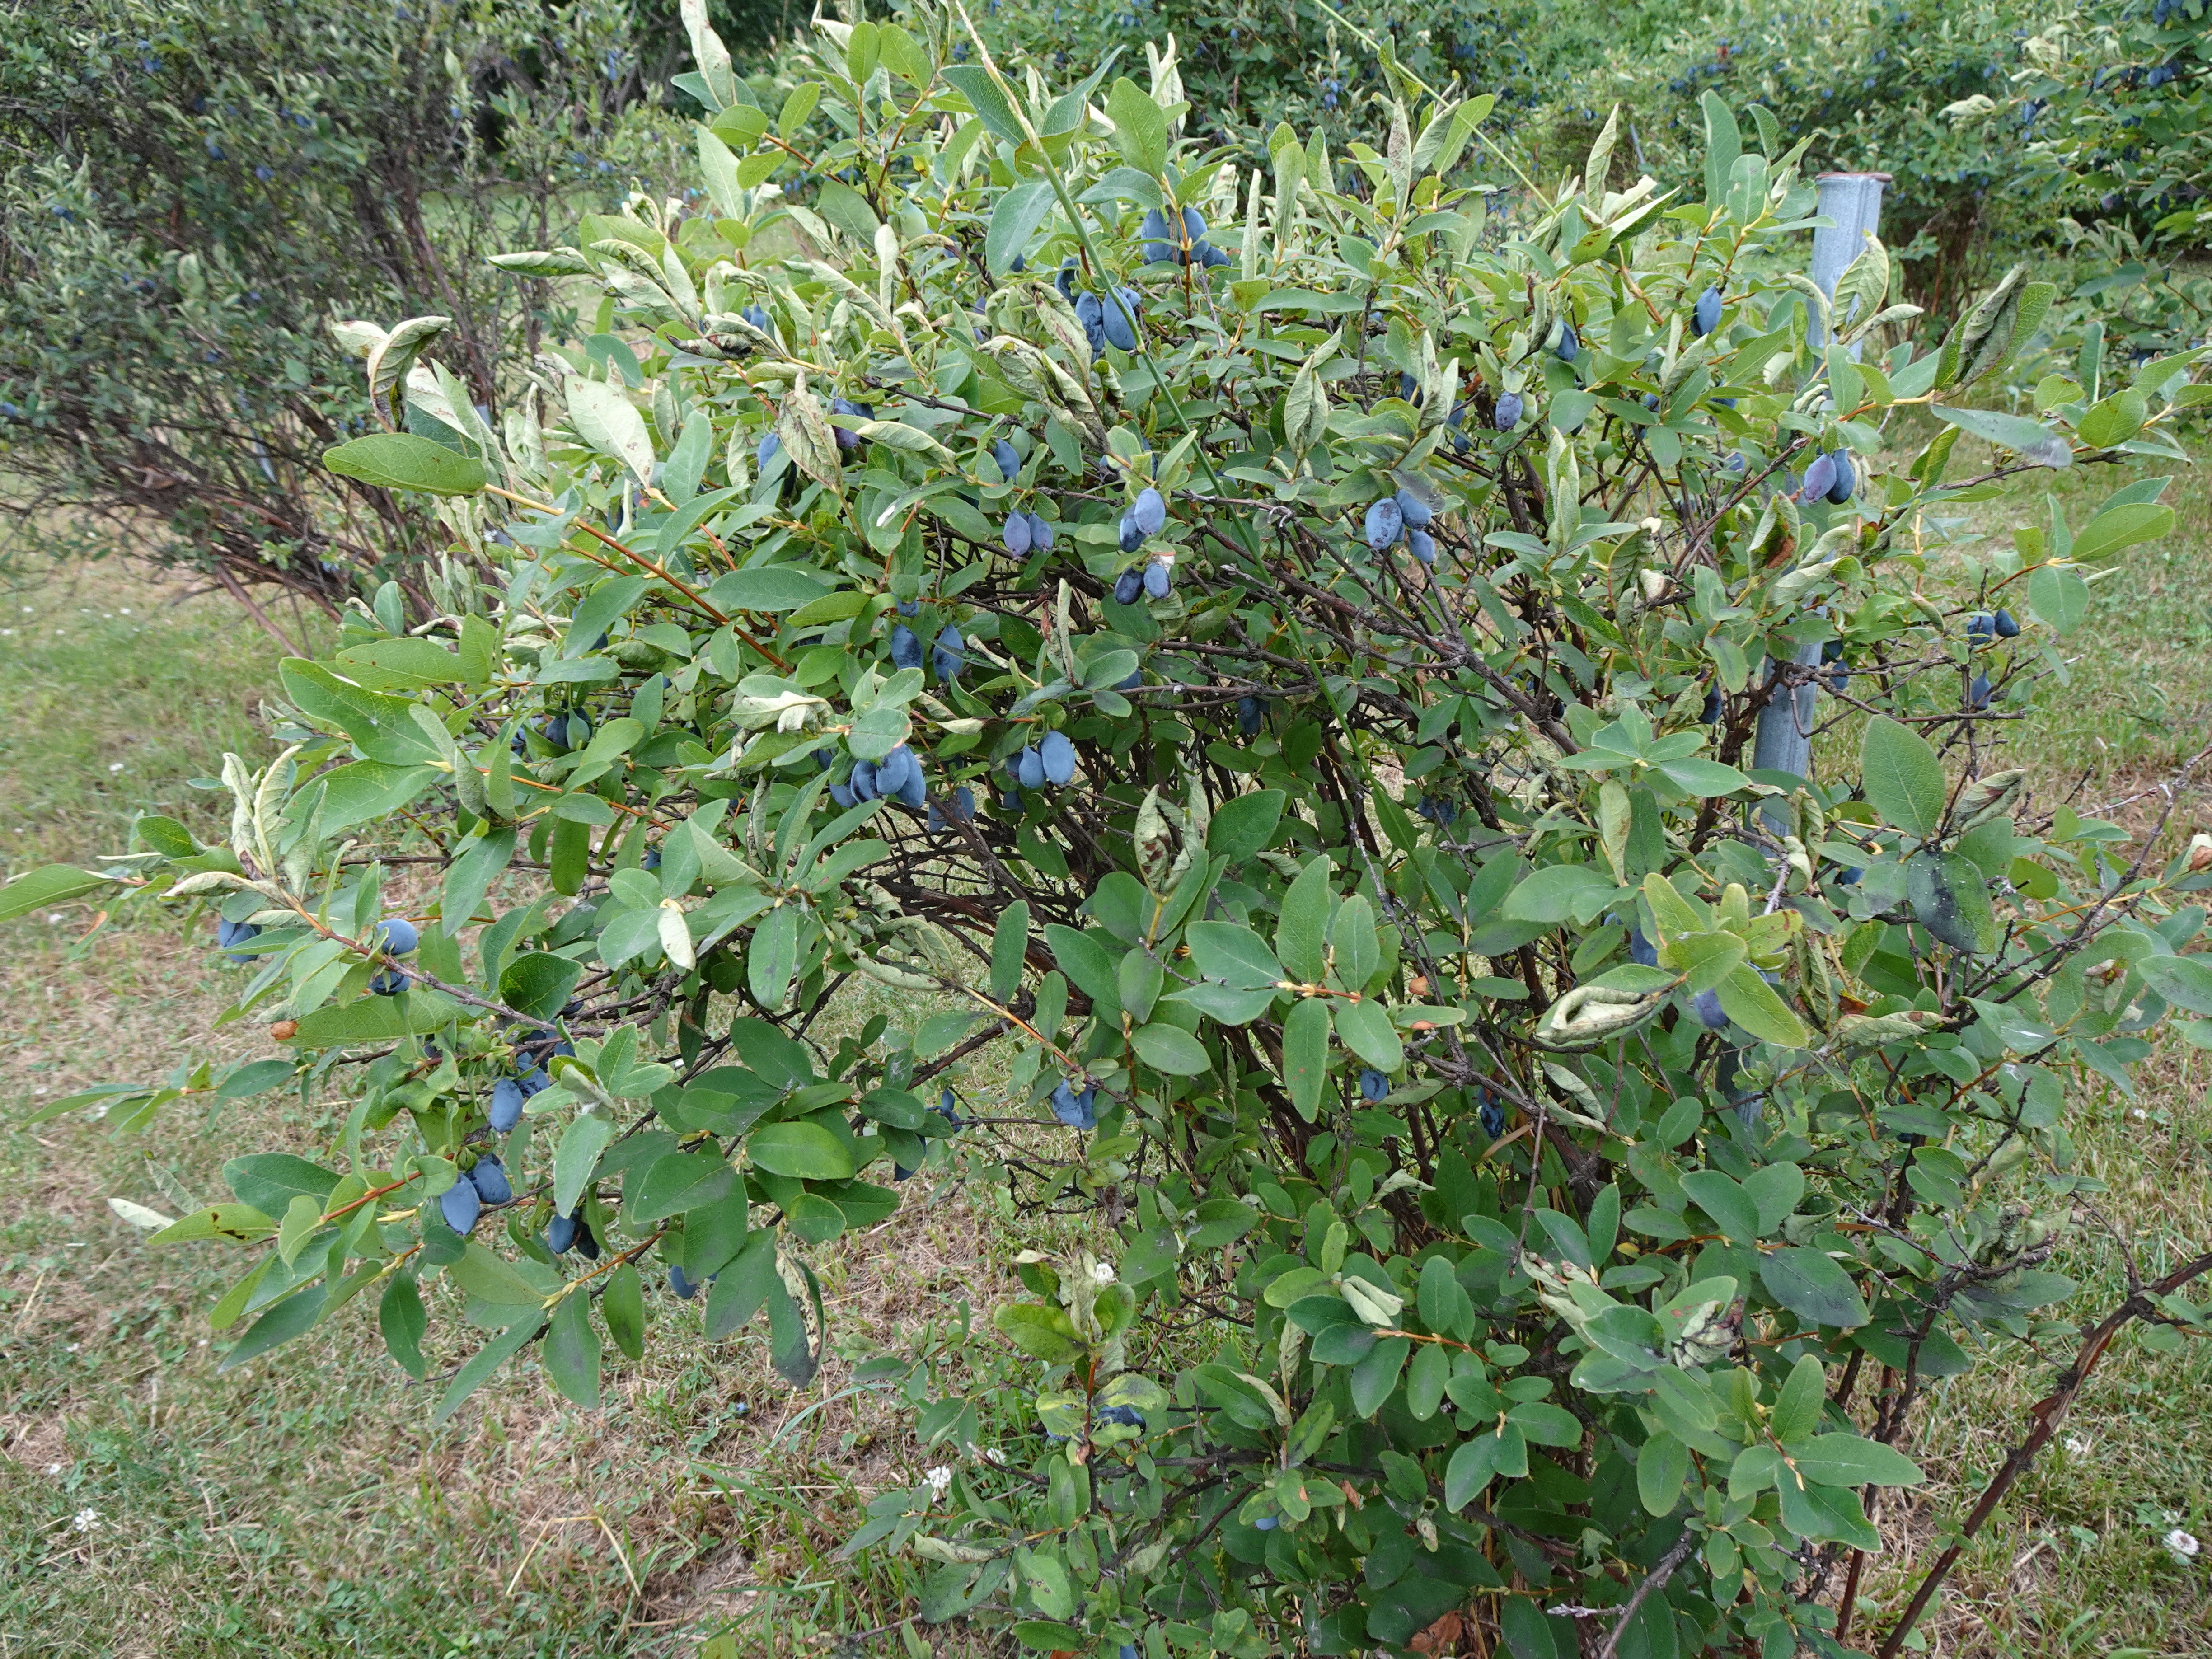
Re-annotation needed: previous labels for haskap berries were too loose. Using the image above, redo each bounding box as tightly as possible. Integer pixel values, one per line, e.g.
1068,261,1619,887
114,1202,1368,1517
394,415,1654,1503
925,1107,963,1132
1255,697,1271,714
1213,469,1239,488
931,803,948,831
843,400,853,409
496,531,512,548
1099,1404,1147,1435
1141,206,1171,263
559,995,584,1016
1409,530,1434,563
548,1209,576,1254
1049,1081,1084,1127
1802,452,1836,506
992,438,1020,483
1093,329,1104,352
729,791,745,809
1076,1089,1096,1129
974,327,984,342
1995,607,2019,637
492,1077,525,1137
1254,1512,1282,1530
1400,371,1427,409
1180,207,1210,262
1478,1086,1488,1104
1631,923,1659,967
1365,498,1403,551
1145,250,1191,266
1553,320,1578,362
1104,288,1136,351
1449,399,1466,427
1042,730,1074,788
1055,258,1081,300
1827,449,1855,506
563,699,593,738
1527,677,1535,691
546,712,567,747
1970,668,1992,709
1727,451,1746,474
1203,244,1230,271
511,727,526,746
1699,679,1729,727
661,675,672,687
1709,396,1736,413
1831,660,1849,690
825,767,858,812
1495,390,1523,431
941,1089,955,1111
928,229,933,234
1112,668,1141,692
669,1265,697,1299
901,199,927,243
1075,290,1102,344
1396,488,1431,529
1047,1401,1072,1440
1006,752,1021,779
1357,1067,1391,1106
1644,392,1660,414
889,592,919,618
707,1271,717,1282
566,704,590,750
1014,739,1049,791
1634,425,1646,440
517,1030,554,1071
368,966,410,996
576,1221,599,1260
1967,609,1996,645
1144,562,1170,600
424,1045,442,1059
882,742,927,811
751,304,766,332
1114,566,1144,606
1120,1642,1139,1659
1090,352,1096,363
1840,865,1864,886
218,917,258,965
1010,426,1030,463
1003,789,1025,813
1480,1097,1505,1137
1820,639,1845,663
1690,285,1721,338
515,1052,533,1066
1238,695,1258,718
1369,311,1381,323
475,1161,512,1205
896,748,931,813
1119,501,1143,551
1455,432,1469,456
545,1018,577,1057
1139,438,1158,480
632,491,647,505
819,744,838,774
890,623,924,672
698,319,704,333
832,398,861,448
644,847,661,871
1695,987,1731,1028
1417,794,1437,818
1136,487,1165,532
757,432,779,467
1604,912,1621,928
1024,509,1055,556
974,296,987,315
944,234,958,258
810,750,817,760
373,918,419,956
853,401,875,445
572,598,608,650
480,1152,503,1175
1010,252,1023,272
893,1132,926,1180
931,621,969,685
1394,525,1404,541
607,505,623,533
740,307,751,323
1121,287,1139,309
440,1171,482,1240
517,1061,550,1099
949,786,974,824
1241,710,1261,735
1437,794,1458,830
1098,454,1108,468
1001,508,1033,559
1503,675,1515,682
849,755,882,806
